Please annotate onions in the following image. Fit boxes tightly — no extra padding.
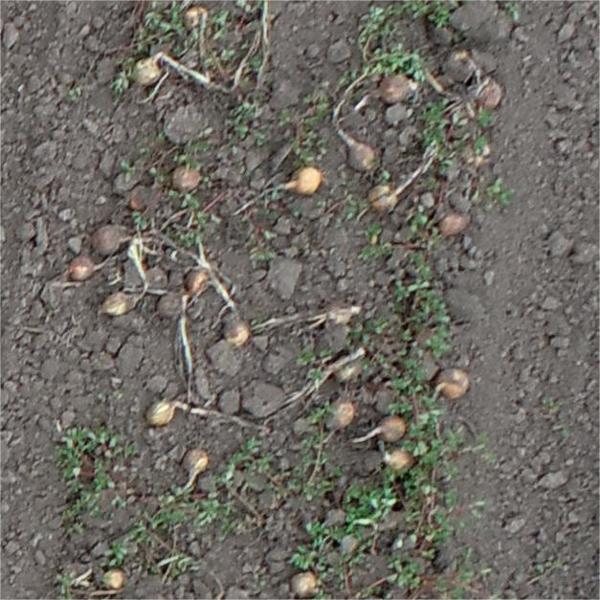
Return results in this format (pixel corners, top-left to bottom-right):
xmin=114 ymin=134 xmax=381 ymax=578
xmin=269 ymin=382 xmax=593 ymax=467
xmin=173 ymin=164 xmax=200 ymax=190
xmin=103 ymin=567 xmax=125 ymax=588
xmin=440 ymin=48 xmax=476 ymax=86
xmin=91 ymin=222 xmax=121 ymax=254
xmin=439 ymin=209 xmax=466 ymax=235
xmin=368 ymin=184 xmax=399 ymax=212
xmin=184 ymin=5 xmax=206 ymax=29
xmin=473 ymin=80 xmax=501 ymax=110
xmin=182 ymin=269 xmax=206 ymax=298
xmin=291 ymin=570 xmax=318 ymax=596
xmin=146 ymin=397 xmax=176 ymax=427
xmin=384 ymin=446 xmax=414 ymax=472
xmin=223 ymin=318 xmax=250 ymax=347
xmin=67 ymin=255 xmax=93 ymax=281
xmin=379 ymin=73 xmax=409 ymax=103
xmin=350 ymin=140 xmax=376 ymax=171
xmin=378 ymin=412 xmax=406 ymax=440
xmin=433 ymin=365 xmax=467 ymax=399
xmin=288 ymin=163 xmax=322 ymax=192
xmin=329 ymin=399 xmax=356 ymax=426
xmin=126 ymin=188 xmax=150 ymax=212
xmin=104 ymin=291 xmax=134 ymax=316
xmin=130 ymin=55 xmax=157 ymax=84
xmin=181 ymin=452 xmax=211 ymax=477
